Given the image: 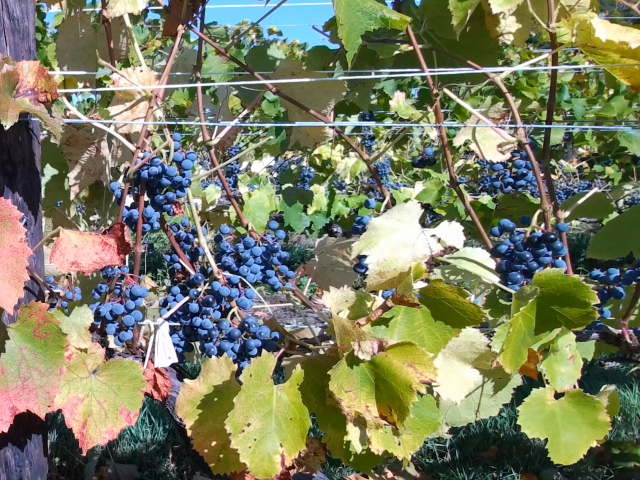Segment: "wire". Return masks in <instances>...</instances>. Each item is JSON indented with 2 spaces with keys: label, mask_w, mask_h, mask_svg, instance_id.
<instances>
[{
  "label": "wire",
  "mask_w": 640,
  "mask_h": 480,
  "mask_svg": "<svg viewBox=\"0 0 640 480\" xmlns=\"http://www.w3.org/2000/svg\"><path fill=\"white\" fill-rule=\"evenodd\" d=\"M640 67V62L624 63L616 65H587V64H543L533 66H495L487 68H476L466 71H426L414 74H392V73H371L365 75H351V76H338L330 78L321 77H308L297 78L291 80H272V79H251L245 81H206L202 83H188V84H131L128 86L120 87H106V88H88V87H61L58 89V93L63 92H86V93H108V92H122L130 91L133 89H190V88H204L208 86L217 87H230V86H250L253 84H270V85H293L299 83H332L340 81H353V80H367L373 78H390V79H416L428 76H468L478 73H496L498 71H535L545 69H584V70H618L626 68Z\"/></svg>",
  "instance_id": "1"
},
{
  "label": "wire",
  "mask_w": 640,
  "mask_h": 480,
  "mask_svg": "<svg viewBox=\"0 0 640 480\" xmlns=\"http://www.w3.org/2000/svg\"><path fill=\"white\" fill-rule=\"evenodd\" d=\"M65 123L83 124H110V125H190V126H283V127H325L355 126V127H445L451 129H488L514 127L522 129H584V130H636L639 124L634 125H587V124H524L516 122L486 123V124H453L447 122H357L325 120L323 122H285V121H192V120H112V119H85L65 118Z\"/></svg>",
  "instance_id": "2"
}]
</instances>
